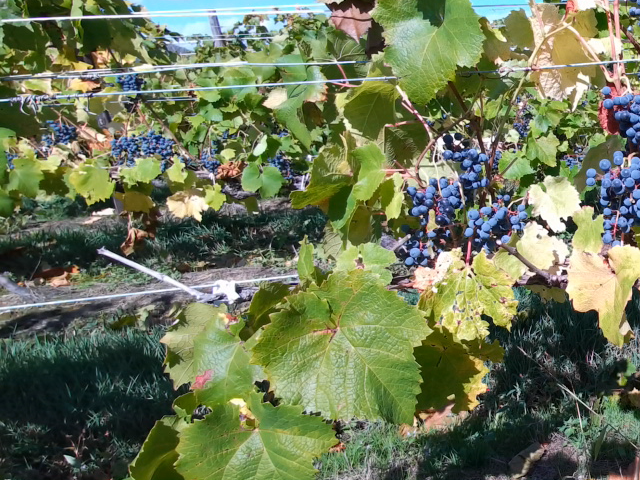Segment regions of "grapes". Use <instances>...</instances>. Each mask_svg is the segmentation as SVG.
Wrapping results in <instances>:
<instances>
[{
	"label": "grapes",
	"instance_id": "01657485",
	"mask_svg": "<svg viewBox=\"0 0 640 480\" xmlns=\"http://www.w3.org/2000/svg\"><path fill=\"white\" fill-rule=\"evenodd\" d=\"M597 168L602 173H605L601 180V192L598 198V205L603 207L602 213L605 216L612 214V209L609 207L611 204L609 199L614 195L621 196L626 192H631V197L635 199V204H633L632 199L629 196H625L620 207L622 216L618 218L613 215L611 218L603 220L602 241L606 245L620 247L622 242L613 236V226L617 223L620 231L624 234H628L635 225L640 226V189H635V186L640 184V157L634 156L630 161V167L623 168L616 176V179H611L612 174L610 171L612 170V165L609 159H601L597 164Z\"/></svg>",
	"mask_w": 640,
	"mask_h": 480
},
{
	"label": "grapes",
	"instance_id": "b958b902",
	"mask_svg": "<svg viewBox=\"0 0 640 480\" xmlns=\"http://www.w3.org/2000/svg\"><path fill=\"white\" fill-rule=\"evenodd\" d=\"M496 211L489 206H483L480 208V212L477 209H472L467 212V228L463 231L465 238H471L474 235V231L477 235L473 237L472 245L474 247L484 248L488 253L493 251L496 246L495 241L491 238V229L498 231H506L510 227L517 232H523L525 230L526 223L521 219L528 217L526 206L524 204H518L516 206L517 214H510L508 216V208L501 206L500 203L495 200L492 202Z\"/></svg>",
	"mask_w": 640,
	"mask_h": 480
},
{
	"label": "grapes",
	"instance_id": "0513c4c2",
	"mask_svg": "<svg viewBox=\"0 0 640 480\" xmlns=\"http://www.w3.org/2000/svg\"><path fill=\"white\" fill-rule=\"evenodd\" d=\"M431 185L426 187V191H418L416 186H408L406 191L411 195L412 203L414 207L409 210V214L412 217H420L419 224L426 226L429 219V209L434 206V199L440 192L441 197L435 200V206L439 209L441 214L435 217V222L439 226L449 225L451 220L456 217V211L462 207V199L459 183L454 181L452 184H448V180L445 176H441L437 182L434 177L429 179Z\"/></svg>",
	"mask_w": 640,
	"mask_h": 480
},
{
	"label": "grapes",
	"instance_id": "84f90ec7",
	"mask_svg": "<svg viewBox=\"0 0 640 480\" xmlns=\"http://www.w3.org/2000/svg\"><path fill=\"white\" fill-rule=\"evenodd\" d=\"M464 138L462 133L455 132L452 135H445L443 137L444 147L446 148L442 153V158L445 161H457L460 162L459 168L462 171L458 175V181L463 184L465 189H479L490 186V180L488 178H482L480 180V174L483 171L482 164L487 162L488 153H479L475 148H466L456 150V146L452 144L454 139L461 141Z\"/></svg>",
	"mask_w": 640,
	"mask_h": 480
},
{
	"label": "grapes",
	"instance_id": "f8a65327",
	"mask_svg": "<svg viewBox=\"0 0 640 480\" xmlns=\"http://www.w3.org/2000/svg\"><path fill=\"white\" fill-rule=\"evenodd\" d=\"M615 105L623 107V110L613 112L614 119L620 121V136L631 141L633 146L640 145V94L627 92L623 96L603 100L605 110H612Z\"/></svg>",
	"mask_w": 640,
	"mask_h": 480
},
{
	"label": "grapes",
	"instance_id": "5460f4e3",
	"mask_svg": "<svg viewBox=\"0 0 640 480\" xmlns=\"http://www.w3.org/2000/svg\"><path fill=\"white\" fill-rule=\"evenodd\" d=\"M424 236V231L418 229L411 239H407L404 242V249H400L398 254L403 258V263L406 266H421L425 267L428 264L429 258V246L435 245V240L439 236L440 238L449 239L451 237L450 230L445 229L439 231L438 229H432L426 234L428 239H431L428 244L424 243L419 249V240Z\"/></svg>",
	"mask_w": 640,
	"mask_h": 480
}]
</instances>
